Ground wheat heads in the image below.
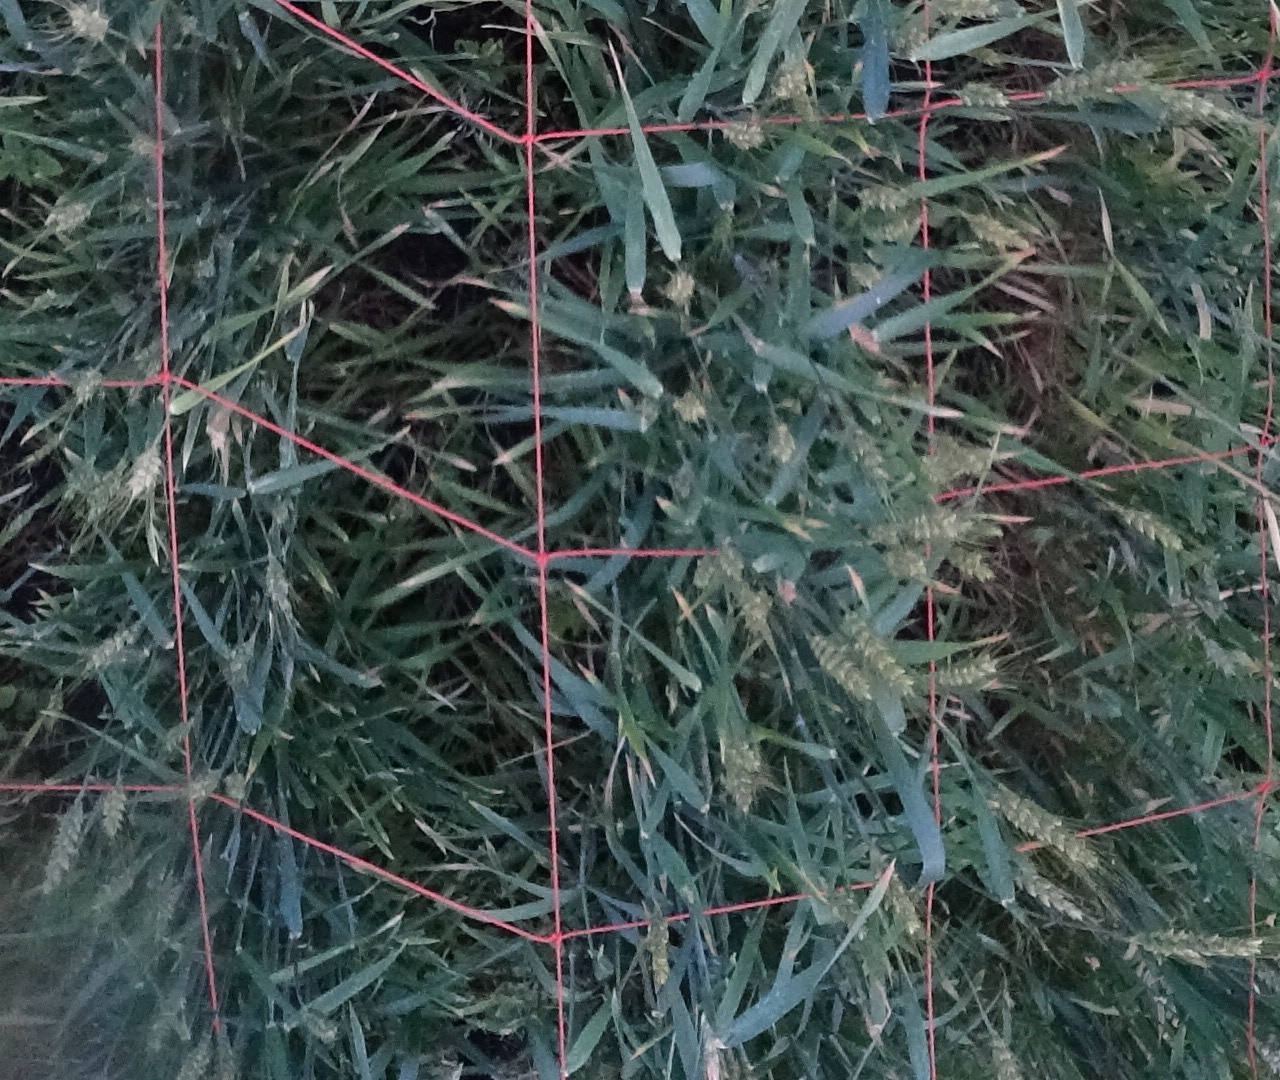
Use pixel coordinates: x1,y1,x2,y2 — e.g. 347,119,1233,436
889,506,970,535
37,292,72,308
161,715,183,751
646,913,674,976
720,730,760,803
850,181,906,210
931,0,999,27
845,417,891,473
29,426,67,464
1151,77,1236,129
707,206,736,237
872,854,918,927
852,219,911,243
882,22,929,47
130,132,160,160
716,542,745,573
186,768,217,799
147,332,187,376
934,542,999,565
664,271,694,303
953,77,1000,112
888,556,936,587
1050,59,1154,102
92,855,147,896
100,780,131,825
699,1010,733,1075
848,263,878,282
55,198,89,232
832,608,906,693
816,883,862,931
173,1036,215,1079
962,201,1025,254
673,385,706,427
295,1009,340,1043
764,424,792,457
155,867,179,935
230,634,250,676
84,469,121,518
723,113,759,147
79,624,139,664
1138,935,1253,962
65,367,104,402
926,432,990,479
130,444,164,497
1012,863,1084,922
215,1026,243,1077
257,553,295,609
146,982,183,1040
1120,500,1184,547
803,638,866,704
736,581,771,624
176,11,196,29
37,794,75,893
70,0,108,38
1005,789,1098,865
1196,637,1233,678
986,1030,1018,1080
776,53,809,95
929,651,1005,687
